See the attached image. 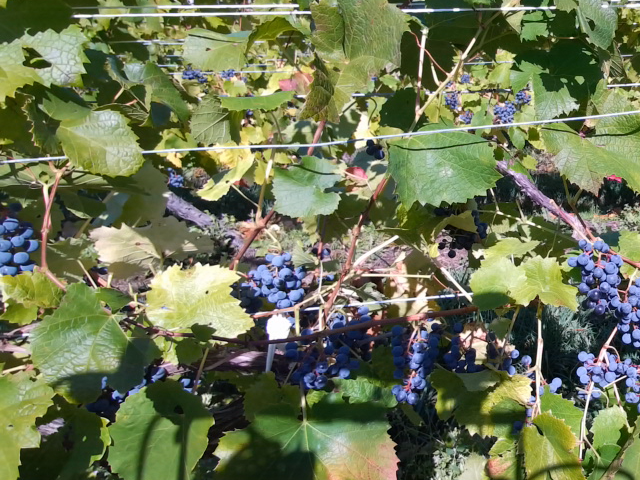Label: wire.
<instances>
[{
  "mask_svg": "<svg viewBox=\"0 0 640 480\" xmlns=\"http://www.w3.org/2000/svg\"><path fill=\"white\" fill-rule=\"evenodd\" d=\"M626 114H640V109H624L617 111H607L595 115H575L558 118H548L538 121L516 122L506 124H475L455 127H445L443 129L428 131H405L384 133L379 135L362 136L352 139H343L337 142H299L291 144H271V145H230V146H200V147H171V148H152L142 150V155L155 153H173V152H202V151H232V150H273V149H293L302 147H339L345 144H354L364 141L381 140L386 138L407 137V136H431L445 134L447 132H457L477 129H508L518 127L540 126L550 123L569 122L577 120H597L609 116H619Z\"/></svg>",
  "mask_w": 640,
  "mask_h": 480,
  "instance_id": "d2f4af69",
  "label": "wire"
},
{
  "mask_svg": "<svg viewBox=\"0 0 640 480\" xmlns=\"http://www.w3.org/2000/svg\"><path fill=\"white\" fill-rule=\"evenodd\" d=\"M300 3L287 4H183V3H165L153 4L147 6H129V5H103V6H81L72 5V10L84 12L105 11V10H127L137 12H119V13H94V14H73V19H96V18H121V17H139V16H156L174 19H196L210 16H232V15H275L283 17H312V11H277V10H230V11H208L194 14H176L158 11H149L155 9L180 8V9H289L300 8Z\"/></svg>",
  "mask_w": 640,
  "mask_h": 480,
  "instance_id": "a73af890",
  "label": "wire"
},
{
  "mask_svg": "<svg viewBox=\"0 0 640 480\" xmlns=\"http://www.w3.org/2000/svg\"><path fill=\"white\" fill-rule=\"evenodd\" d=\"M530 10H552L559 11V6L554 5H528L519 7H491V6H477V7H430V8H403V13H432V12H521Z\"/></svg>",
  "mask_w": 640,
  "mask_h": 480,
  "instance_id": "4f2155b8",
  "label": "wire"
},
{
  "mask_svg": "<svg viewBox=\"0 0 640 480\" xmlns=\"http://www.w3.org/2000/svg\"><path fill=\"white\" fill-rule=\"evenodd\" d=\"M464 291H450L444 293H434L430 295H415V296H396L384 299H370V300H357L352 302H340L335 303V308L354 307L360 305H372V304H386L398 301H417V300H432L436 298H446L452 296H464Z\"/></svg>",
  "mask_w": 640,
  "mask_h": 480,
  "instance_id": "f0478fcc",
  "label": "wire"
},
{
  "mask_svg": "<svg viewBox=\"0 0 640 480\" xmlns=\"http://www.w3.org/2000/svg\"><path fill=\"white\" fill-rule=\"evenodd\" d=\"M65 155H54L46 158H16L11 160H0V165H13L19 163H48L56 160H65Z\"/></svg>",
  "mask_w": 640,
  "mask_h": 480,
  "instance_id": "a009ed1b",
  "label": "wire"
},
{
  "mask_svg": "<svg viewBox=\"0 0 640 480\" xmlns=\"http://www.w3.org/2000/svg\"><path fill=\"white\" fill-rule=\"evenodd\" d=\"M621 6H627V7H639L640 6V1H619V2H614L612 4H603L602 8L603 9H614L616 7H621Z\"/></svg>",
  "mask_w": 640,
  "mask_h": 480,
  "instance_id": "34cfc8c6",
  "label": "wire"
}]
</instances>
